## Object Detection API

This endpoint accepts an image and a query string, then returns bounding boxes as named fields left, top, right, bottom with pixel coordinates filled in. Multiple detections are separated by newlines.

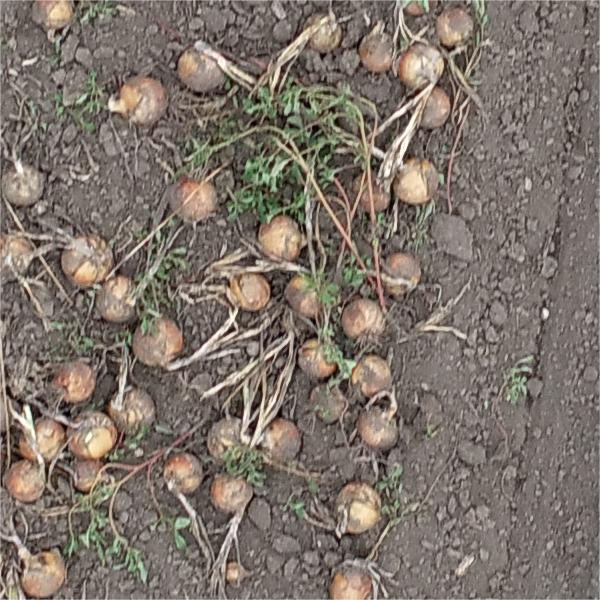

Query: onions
left=397, top=44, right=442, bottom=87
left=299, top=339, right=337, bottom=377
left=435, top=6, right=473, bottom=44
left=3, top=461, right=43, bottom=501
left=354, top=179, right=387, bottom=214
left=418, top=88, right=451, bottom=125
left=162, top=451, right=203, bottom=492
left=53, top=360, right=95, bottom=402
left=286, top=277, right=326, bottom=318
left=178, top=43, right=225, bottom=89
left=4, top=161, right=42, bottom=205
left=334, top=484, right=381, bottom=533
left=257, top=214, right=302, bottom=259
left=350, top=354, right=390, bottom=396
left=132, top=315, right=183, bottom=363
left=96, top=275, right=137, bottom=321
left=167, top=176, right=216, bottom=221
left=224, top=559, right=245, bottom=584
left=111, top=76, right=163, bottom=124
left=306, top=17, right=340, bottom=52
left=381, top=250, right=418, bottom=292
left=228, top=273, right=269, bottom=309
left=398, top=0, right=436, bottom=14
left=70, top=414, right=116, bottom=456
left=34, top=0, right=72, bottom=31
left=340, top=298, right=385, bottom=339
left=327, top=562, right=376, bottom=599
left=208, top=415, right=247, bottom=458
left=209, top=474, right=250, bottom=513
left=27, top=416, right=65, bottom=459
left=393, top=160, right=436, bottom=204
left=109, top=386, right=155, bottom=433
left=70, top=459, right=102, bottom=491
left=304, top=389, right=344, bottom=422
left=20, top=549, right=64, bottom=593
left=356, top=403, right=396, bottom=446
left=61, top=233, right=109, bottom=283
left=263, top=417, right=300, bottom=460
left=357, top=29, right=394, bottom=70
left=0, top=235, right=33, bottom=272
